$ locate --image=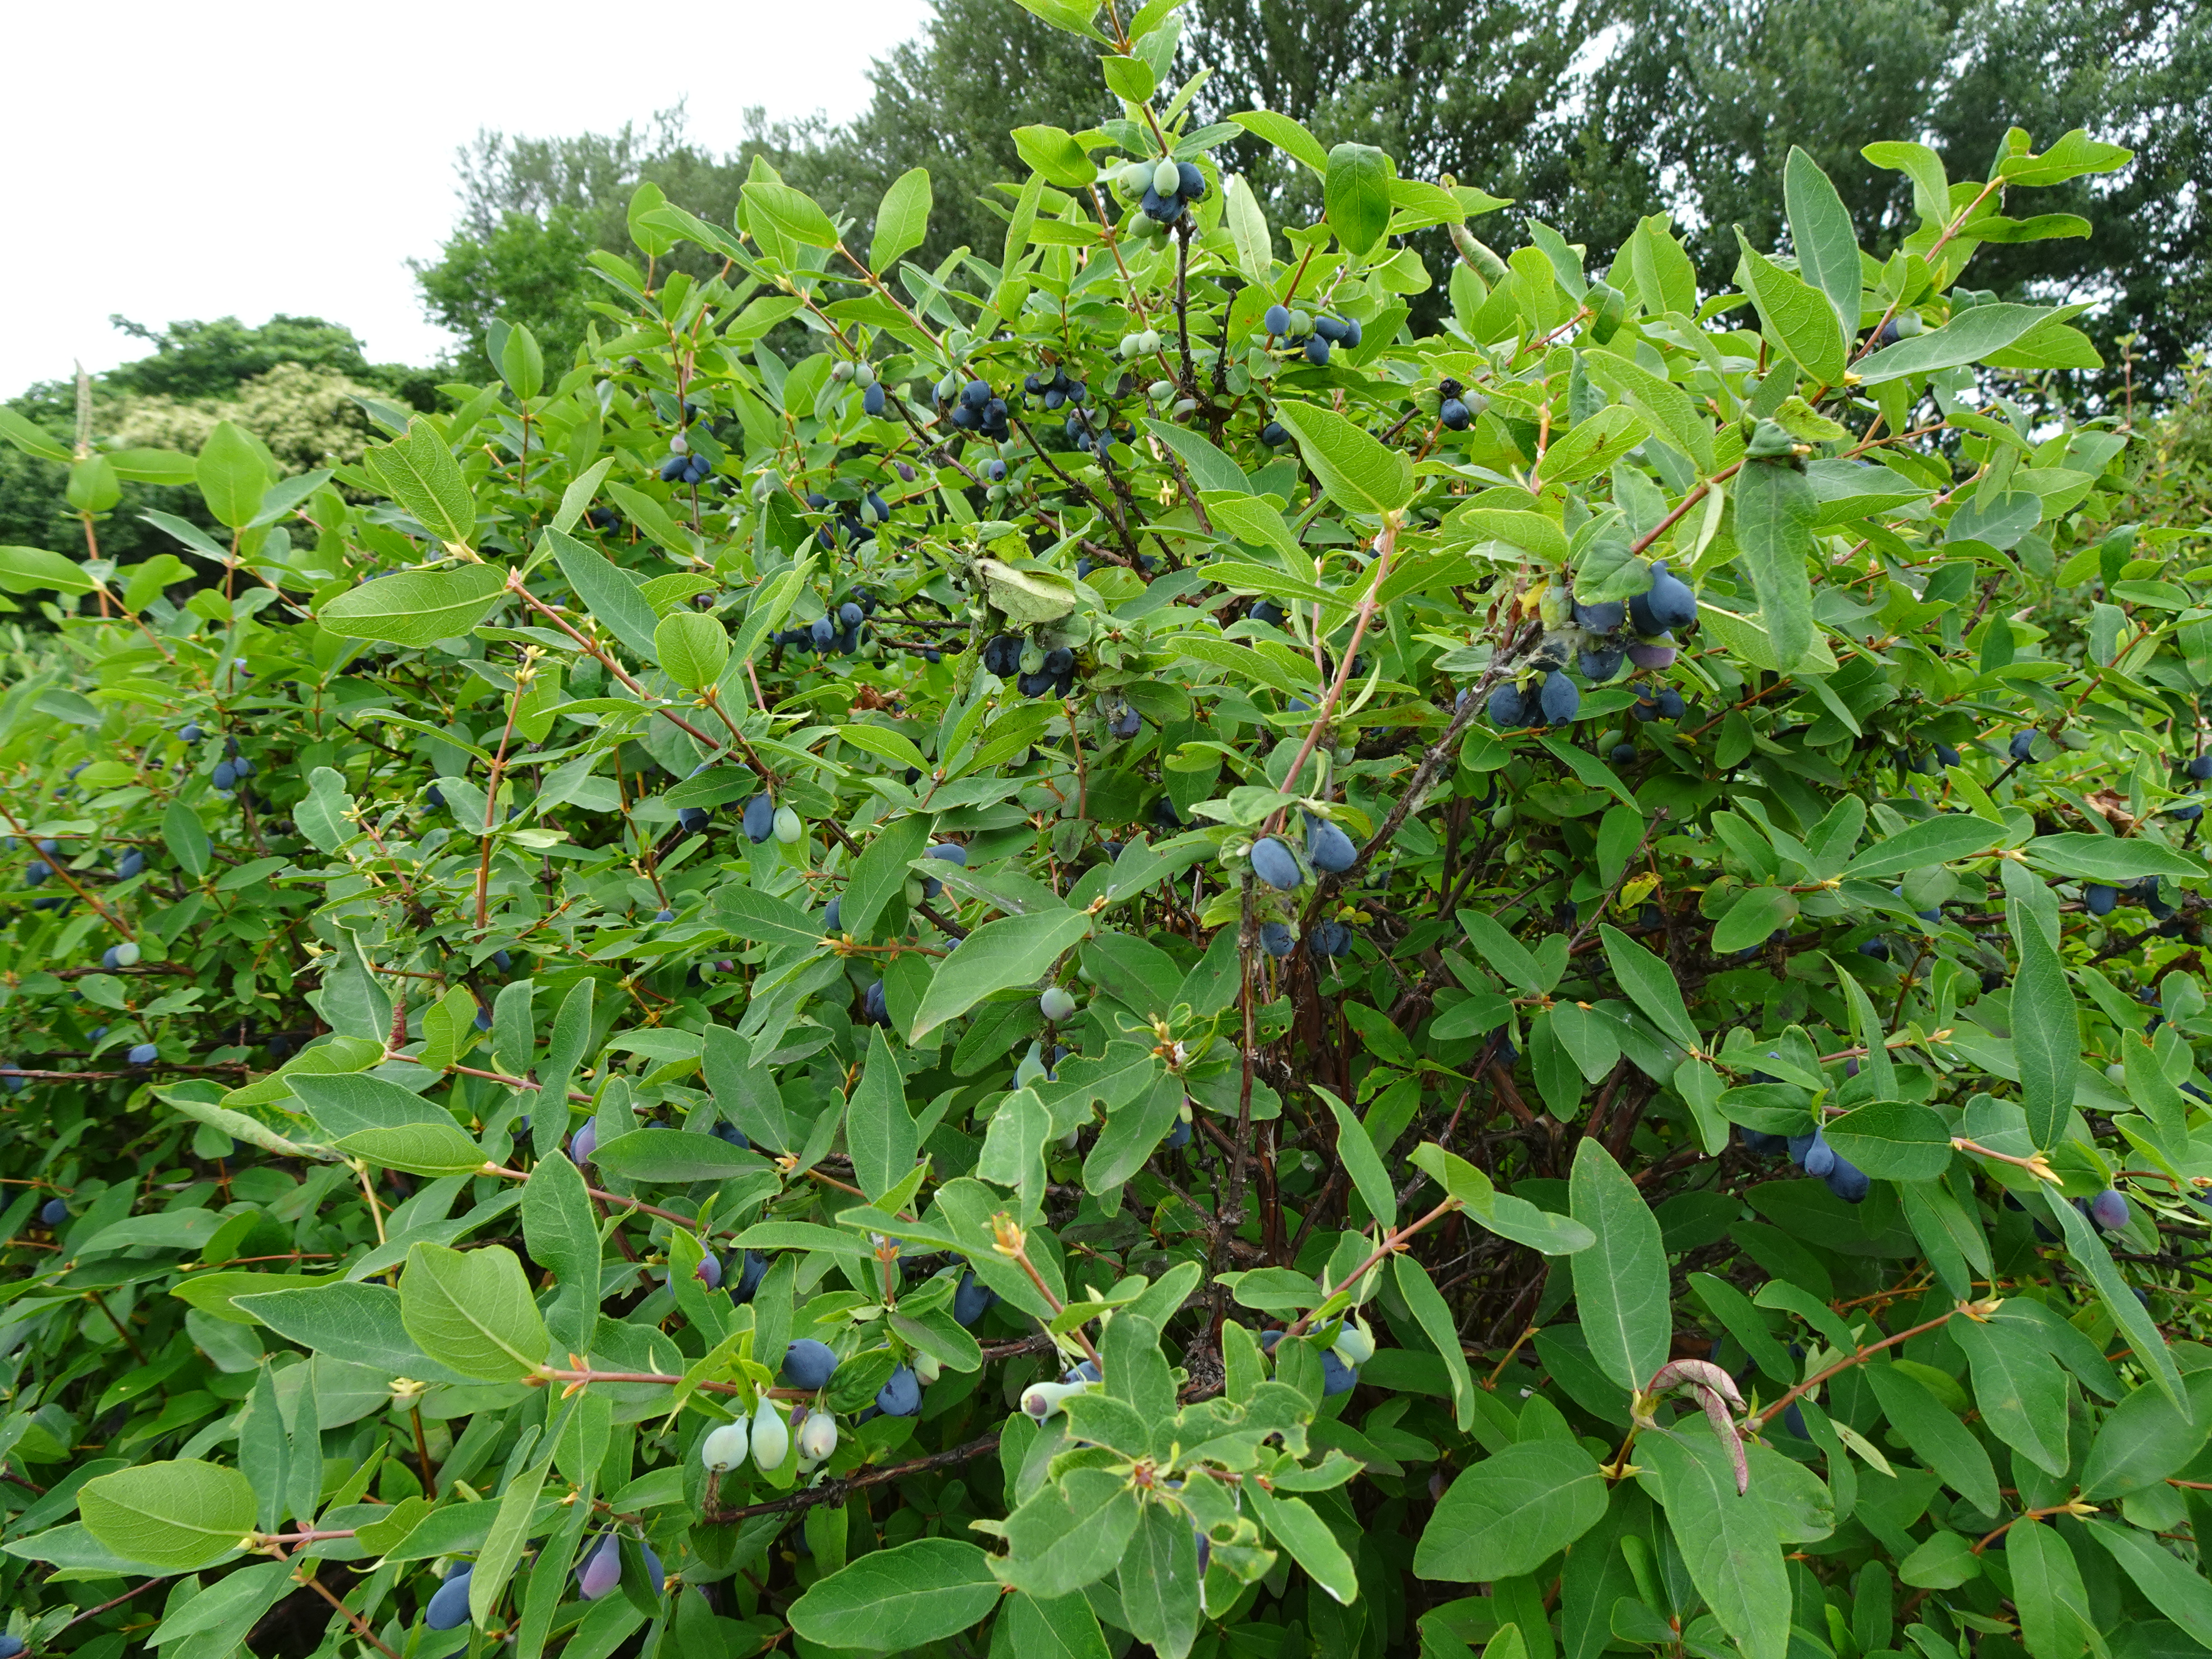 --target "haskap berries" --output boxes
[1882,319,1903,348]
[1111,373,1135,399]
[574,1118,608,1165]
[2087,928,2106,951]
[1283,334,1305,361]
[555,595,566,606]
[1769,928,1785,942]
[699,962,717,982]
[393,1187,409,1200]
[896,461,917,482]
[1138,329,1161,353]
[1040,534,1056,546]
[773,633,788,644]
[1044,387,1065,410]
[1149,153,1184,198]
[1151,223,1171,251]
[2191,756,2212,780]
[1498,1038,1519,1061]
[685,963,702,987]
[1647,563,1699,627]
[270,1037,286,1056]
[121,850,144,879]
[426,1571,469,1629]
[1934,742,1962,769]
[1893,885,1903,895]
[862,639,880,658]
[2179,1082,2197,1103]
[668,437,689,452]
[863,378,888,416]
[719,1121,750,1149]
[629,356,641,364]
[1174,156,1207,201]
[1894,750,1908,763]
[1064,1353,1103,1385]
[661,453,687,481]
[873,657,889,671]
[1590,955,1607,971]
[444,559,458,570]
[1577,640,1624,683]
[1017,667,1055,696]
[37,839,58,854]
[932,383,955,408]
[1597,729,1623,756]
[913,1349,942,1381]
[1118,158,1156,197]
[648,1119,667,1130]
[829,358,856,385]
[1486,680,1524,728]
[413,663,427,679]
[798,627,815,651]
[874,988,891,1021]
[1332,745,1358,765]
[701,421,712,431]
[903,876,928,910]
[1097,841,1125,863]
[910,649,925,657]
[402,562,416,571]
[1855,732,1871,753]
[364,662,379,678]
[1263,420,1291,445]
[1067,377,1085,402]
[959,379,992,408]
[1250,599,1290,627]
[708,1125,721,1139]
[1897,310,1923,338]
[2033,1218,2059,1244]
[3,1063,22,1089]
[595,506,613,522]
[1567,901,1579,909]
[978,424,993,437]
[204,719,216,736]
[1116,421,1138,445]
[1669,825,1692,837]
[1491,804,1515,830]
[1166,1479,1183,1488]
[841,512,878,551]
[782,1336,839,1391]
[1736,758,1751,770]
[2057,731,2092,751]
[1049,366,1073,387]
[2083,880,2120,916]
[860,488,877,528]
[260,801,272,815]
[1077,964,1097,984]
[1108,701,1142,741]
[817,521,836,550]
[341,656,367,675]
[1013,1039,1053,1094]
[1174,409,1194,423]
[1847,1061,1859,1076]
[1437,393,1471,430]
[2141,987,2157,1000]
[1120,333,1141,358]
[222,735,238,757]
[699,594,713,606]
[1828,1147,1868,1204]
[495,614,507,628]
[444,1560,470,1583]
[1628,635,1678,672]
[232,756,253,777]
[1054,1045,1069,1061]
[1,1636,24,1654]
[116,943,142,966]
[249,707,268,715]
[509,1113,534,1141]
[279,822,293,835]
[1099,429,1117,458]
[1287,690,1319,713]
[2174,791,2204,819]
[780,628,803,641]
[1629,684,1659,720]
[1075,555,1097,579]
[69,761,88,779]
[1455,685,1474,709]
[641,1543,667,1597]
[1043,646,1074,677]
[1054,672,1077,701]
[890,1238,912,1266]
[1428,1471,1449,1501]
[2133,1288,2150,1309]
[657,409,669,423]
[860,750,873,764]
[1260,300,1291,341]
[828,499,842,508]
[42,858,61,875]
[37,1197,72,1228]
[743,790,776,845]
[1540,583,1573,630]
[242,663,253,676]
[986,485,1008,502]
[1303,332,1331,367]
[1779,917,1795,930]
[7,836,18,849]
[824,894,847,930]
[128,1043,158,1064]
[1038,984,1077,1021]
[808,494,827,507]
[1370,548,1380,559]
[1035,394,1052,413]
[1078,429,1096,452]
[2002,1190,2026,1211]
[996,425,1011,444]
[482,960,500,977]
[1308,918,1345,957]
[2092,1189,2128,1231]
[977,458,992,480]
[1332,1329,1378,1367]
[855,359,881,388]
[2158,917,2189,938]
[676,804,712,837]
[684,465,700,485]
[1382,726,1392,733]
[267,823,280,835]
[1748,706,1776,732]
[982,398,1011,424]
[1148,380,1177,400]
[1166,801,1178,817]
[1319,1347,1359,1397]
[1315,309,1351,338]
[1332,313,1364,349]
[1786,1123,1820,1163]
[1438,375,1465,399]
[1859,937,1891,962]
[945,937,961,949]
[838,627,858,655]
[576,1526,611,1584]
[810,616,834,646]
[606,518,617,538]
[839,602,863,628]
[1461,385,1494,419]
[1141,554,1155,563]
[1353,655,1362,672]
[55,788,68,796]
[1365,872,1381,890]
[798,1527,814,1554]
[1710,1339,1722,1361]
[1815,743,1829,756]
[886,648,900,658]
[966,409,985,431]
[949,1252,967,1266]
[1258,917,1294,959]
[1058,1129,1078,1150]
[925,640,942,665]
[693,1245,724,1292]
[1565,911,1575,928]
[475,1037,498,1054]
[1261,1329,1285,1347]
[2146,875,2177,921]
[1048,736,1060,744]
[387,1438,404,1457]
[698,1582,715,1608]
[656,909,678,921]
[364,1276,378,1284]
[868,489,891,522]
[2105,1063,2129,1089]
[1577,595,1626,634]
[362,574,374,583]
[1066,407,1090,441]
[1628,586,1668,638]
[799,1408,840,1460]
[1025,373,1054,394]
[731,1250,770,1308]
[939,368,957,399]
[580,1531,624,1600]
[904,766,921,785]
[1785,1405,1810,1438]
[1611,744,1636,764]
[1921,743,1941,775]
[1308,815,1360,875]
[749,1396,790,1472]
[101,945,123,970]
[862,977,886,1017]
[632,393,647,413]
[2183,930,2202,946]
[1021,632,1046,675]
[1654,684,1687,719]
[1286,304,1319,341]
[1741,1128,1757,1148]
[86,1026,109,1041]
[893,703,904,711]
[1908,906,1942,931]
[951,1270,993,1329]
[473,1007,493,1030]
[1753,1132,1767,1140]
[1333,928,1356,959]
[1127,211,1158,237]
[178,724,205,744]
[1371,727,1382,736]
[2010,727,2039,763]
[911,632,928,642]
[1505,839,1525,865]
[1165,1112,1196,1150]
[1096,693,1107,717]
[983,631,1019,678]
[1250,833,1302,891]
[27,861,46,885]
[989,460,1006,482]
[923,876,946,898]
[1741,945,1758,958]
[772,802,801,845]
[715,950,733,971]
[1910,758,1925,774]
[376,1275,387,1286]
[1020,1382,1063,1419]
[856,589,875,615]
[33,897,60,909]
[2120,876,2152,895]
[427,783,446,806]
[508,807,521,819]
[495,949,512,973]
[1757,1053,1783,1084]
[690,454,712,474]
[1141,179,1179,219]
[701,1413,751,1473]
[876,1362,920,1416]
[484,775,493,793]
[1539,666,1582,725]
[1804,1126,1834,1178]
[928,844,971,862]
[1532,640,1572,672]
[430,550,441,562]
[212,760,237,790]
[207,838,216,856]
[1007,479,1024,497]
[1524,835,1550,857]
[951,405,975,429]
[1639,903,1660,928]
[683,399,698,414]
[1980,973,2004,992]
[424,804,436,813]
[1740,373,1763,397]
